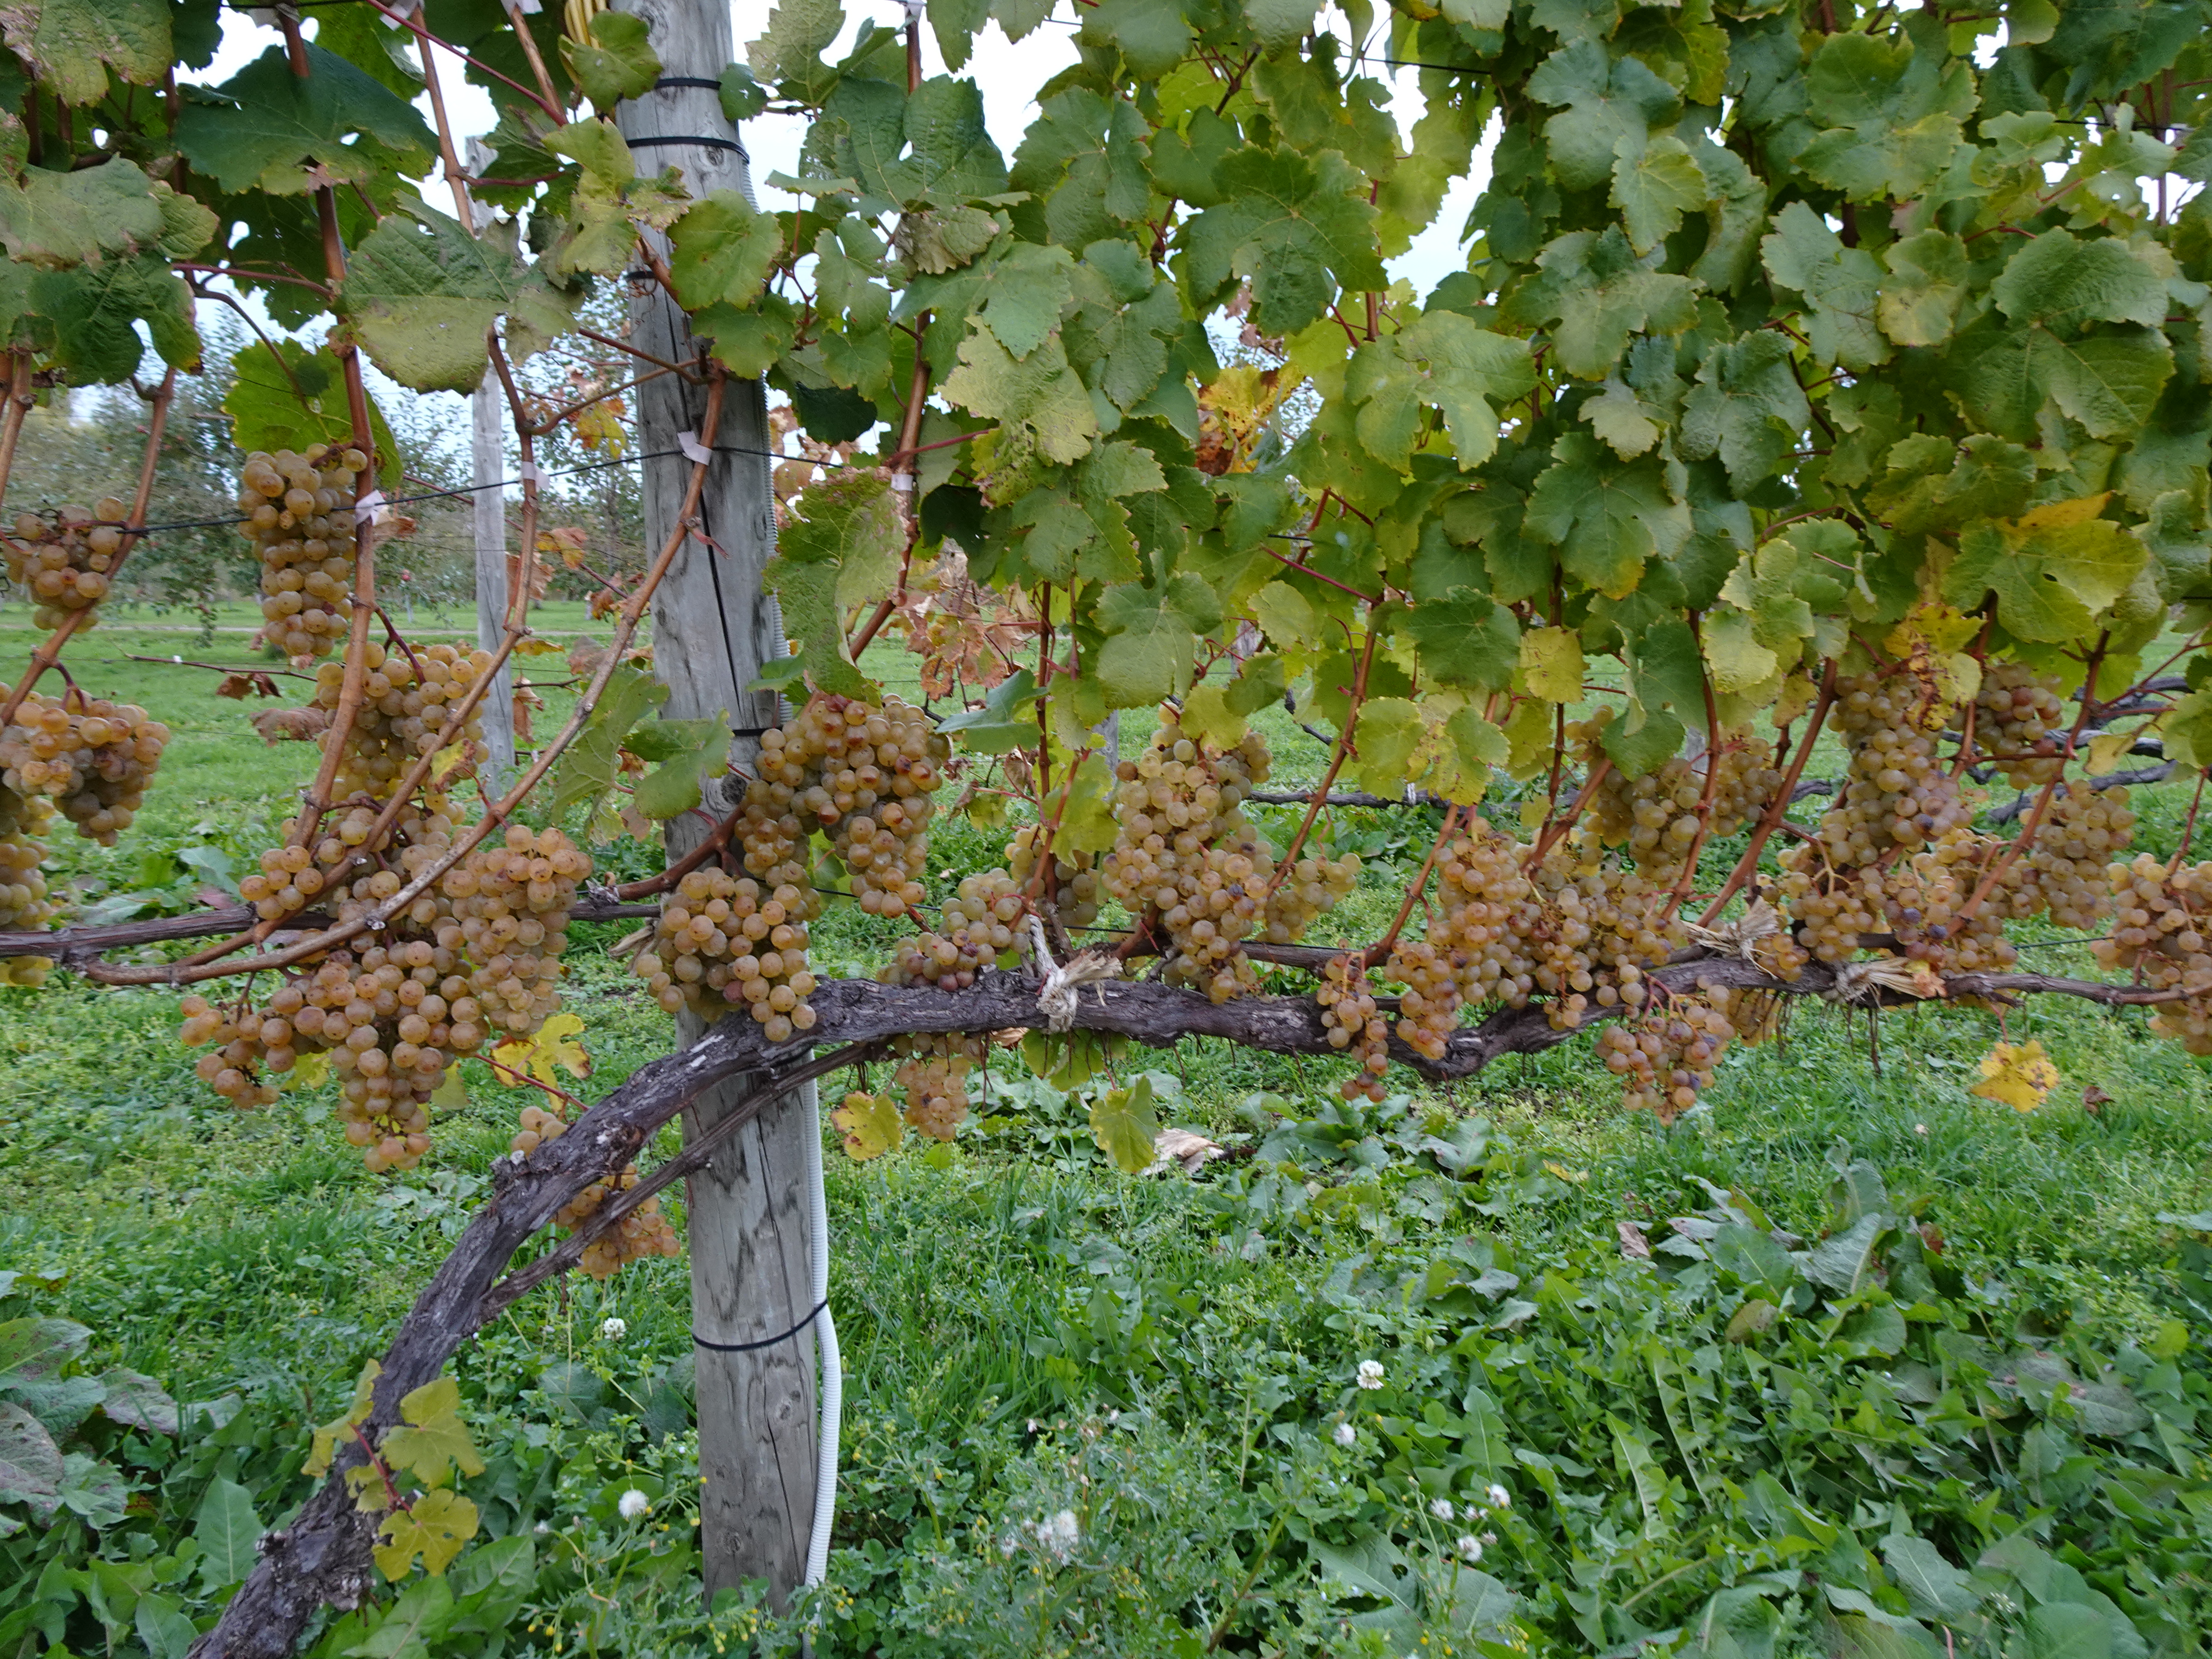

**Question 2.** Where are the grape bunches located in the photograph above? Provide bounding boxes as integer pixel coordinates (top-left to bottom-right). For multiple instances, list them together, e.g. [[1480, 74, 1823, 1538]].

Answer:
[[568, 1162, 682, 1278], [1594, 1015, 1670, 1111], [1433, 816, 1532, 1007], [1606, 758, 1706, 892], [0, 682, 56, 987], [1102, 752, 1226, 912], [1144, 701, 1272, 799], [874, 931, 985, 1142], [0, 689, 170, 847], [2091, 853, 2212, 1054], [1315, 938, 1388, 1101], [1947, 661, 2064, 790], [1882, 870, 1957, 965], [178, 986, 306, 1113], [2019, 779, 2136, 931], [511, 1106, 602, 1223], [378, 638, 497, 787], [1706, 918, 1724, 933], [3, 496, 127, 634], [1912, 828, 2047, 974], [1595, 953, 1655, 1007], [1383, 939, 1460, 1060], [1754, 914, 1809, 994], [720, 878, 821, 1041], [1649, 976, 1735, 1125], [238, 806, 401, 919], [236, 438, 368, 671], [1110, 911, 1160, 986], [942, 867, 1030, 965], [1815, 779, 1905, 867], [1785, 866, 1884, 963], [442, 823, 592, 1039], [1755, 840, 1827, 914], [1004, 822, 1098, 938], [1220, 825, 1275, 882], [633, 867, 760, 1026], [823, 693, 951, 919], [315, 640, 407, 797], [1255, 852, 1363, 945], [1513, 818, 1601, 875], [1563, 705, 1637, 849], [1584, 868, 1689, 965], [294, 941, 489, 1172], [1153, 848, 1267, 1004], [1826, 671, 1971, 845], [1529, 888, 1593, 1031], [1704, 719, 1783, 837], [1496, 844, 1574, 1012], [331, 790, 479, 952], [733, 699, 878, 884]]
